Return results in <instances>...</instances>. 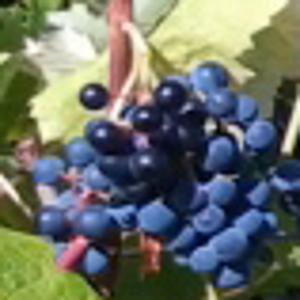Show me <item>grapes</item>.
<instances>
[{"label": "grapes", "mask_w": 300, "mask_h": 300, "mask_svg": "<svg viewBox=\"0 0 300 300\" xmlns=\"http://www.w3.org/2000/svg\"><path fill=\"white\" fill-rule=\"evenodd\" d=\"M228 89V70L202 61L163 75L154 101L130 104L122 122L87 120L57 157L33 160L30 180L55 194L31 213V231L55 243L56 259L82 236L85 277L104 275L112 242L136 232L160 237L177 267L209 275L214 290L244 288L250 254L281 229L266 207L300 193V155L274 153L278 127Z\"/></svg>", "instance_id": "01657485"}, {"label": "grapes", "mask_w": 300, "mask_h": 300, "mask_svg": "<svg viewBox=\"0 0 300 300\" xmlns=\"http://www.w3.org/2000/svg\"><path fill=\"white\" fill-rule=\"evenodd\" d=\"M78 105L87 112H101L109 105V88L99 82H85L77 88Z\"/></svg>", "instance_id": "b958b902"}]
</instances>
